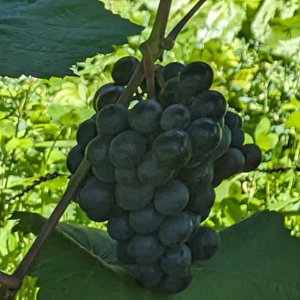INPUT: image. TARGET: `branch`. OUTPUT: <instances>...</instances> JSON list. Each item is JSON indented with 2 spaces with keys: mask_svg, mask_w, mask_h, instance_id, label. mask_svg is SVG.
<instances>
[{
  "mask_svg": "<svg viewBox=\"0 0 300 300\" xmlns=\"http://www.w3.org/2000/svg\"><path fill=\"white\" fill-rule=\"evenodd\" d=\"M91 171L92 163L85 157L76 168L74 174L69 178L68 187L64 195L56 204L50 218L44 223L37 239L31 245V249L25 255L17 270L12 273V276L0 271V299H11L16 290L21 287L23 277L39 255V251L45 247L51 231L59 223L63 212L73 200L78 188L85 183Z\"/></svg>",
  "mask_w": 300,
  "mask_h": 300,
  "instance_id": "1",
  "label": "branch"
},
{
  "mask_svg": "<svg viewBox=\"0 0 300 300\" xmlns=\"http://www.w3.org/2000/svg\"><path fill=\"white\" fill-rule=\"evenodd\" d=\"M206 2V0H199L190 11L178 22L171 32L165 36V27L168 22V14L171 6V0H161L155 18V24L153 26V32L148 39L150 50L154 58H159L162 54L163 48L171 50L175 44L176 38L180 34L182 28L187 21L194 15V13Z\"/></svg>",
  "mask_w": 300,
  "mask_h": 300,
  "instance_id": "2",
  "label": "branch"
},
{
  "mask_svg": "<svg viewBox=\"0 0 300 300\" xmlns=\"http://www.w3.org/2000/svg\"><path fill=\"white\" fill-rule=\"evenodd\" d=\"M145 77L144 72V62L142 61L137 69L135 70L133 76L129 80L128 84L124 86V90L122 91V94L117 100V103H122L129 107V104L131 103V100L133 98L134 92L136 91L138 85L141 83V81Z\"/></svg>",
  "mask_w": 300,
  "mask_h": 300,
  "instance_id": "3",
  "label": "branch"
}]
</instances>
